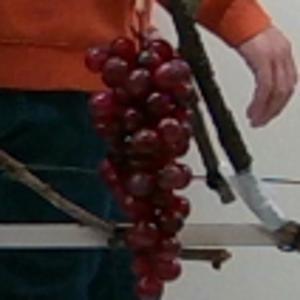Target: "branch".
<instances>
[{
  "mask_svg": "<svg viewBox=\"0 0 300 300\" xmlns=\"http://www.w3.org/2000/svg\"><path fill=\"white\" fill-rule=\"evenodd\" d=\"M203 0H152L171 17L183 61L191 67L190 84L199 93L197 107L203 124L192 137L205 172V188L220 197L221 205L237 199L263 225L264 233L281 252L300 254V223L290 220L271 198L258 177L257 162L245 132L214 70L203 37L196 28V8ZM203 101L218 156L205 123Z\"/></svg>",
  "mask_w": 300,
  "mask_h": 300,
  "instance_id": "1",
  "label": "branch"
},
{
  "mask_svg": "<svg viewBox=\"0 0 300 300\" xmlns=\"http://www.w3.org/2000/svg\"><path fill=\"white\" fill-rule=\"evenodd\" d=\"M0 160L13 175L22 180L24 183L28 184L41 196H45L67 215L73 216L80 222L103 231L105 234H109L114 238L124 236L128 231L105 219L99 218L88 211L83 210L76 204H73L63 194L51 189L45 182L36 178L30 171L27 170L23 163L18 162L11 157L2 146H0Z\"/></svg>",
  "mask_w": 300,
  "mask_h": 300,
  "instance_id": "2",
  "label": "branch"
},
{
  "mask_svg": "<svg viewBox=\"0 0 300 300\" xmlns=\"http://www.w3.org/2000/svg\"><path fill=\"white\" fill-rule=\"evenodd\" d=\"M179 253L178 260L198 262L215 271H220L222 264L232 258V252L226 248H181Z\"/></svg>",
  "mask_w": 300,
  "mask_h": 300,
  "instance_id": "3",
  "label": "branch"
}]
</instances>
